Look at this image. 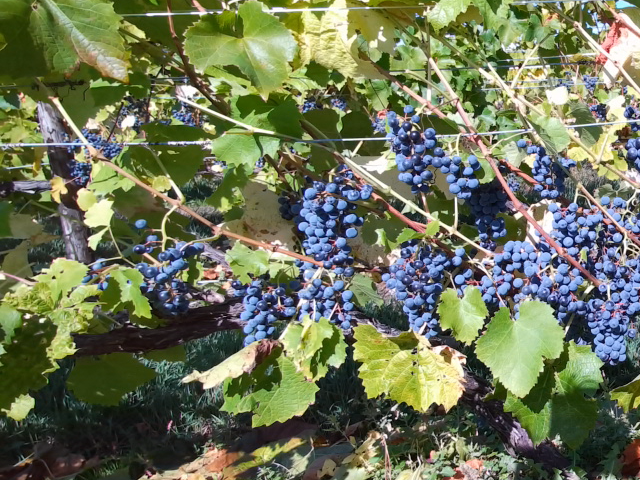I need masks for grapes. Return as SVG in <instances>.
<instances>
[{
	"label": "grapes",
	"mask_w": 640,
	"mask_h": 480,
	"mask_svg": "<svg viewBox=\"0 0 640 480\" xmlns=\"http://www.w3.org/2000/svg\"><path fill=\"white\" fill-rule=\"evenodd\" d=\"M534 235L539 241L535 247L528 241L507 240L502 246L504 253L493 257L495 264L492 280L488 275H483L477 285L484 302L494 304L497 308H508L510 302L507 299L500 301L496 294L506 296L514 288L520 290L510 294V300L514 303V320H518L521 315L519 302L529 295L537 296L550 307L556 308L554 316L563 325L569 322L573 313L585 315L591 334L595 337L594 353L611 366L625 362L627 345L623 337L627 335L629 339H633L637 336V331L629 328L628 322L630 317L640 311V254L626 261L634 271L613 263V260L621 259L616 244L606 249V255L601 257V262L595 263L591 257H587L586 263L581 266L598 281H605L607 275L613 276L610 289L617 292H613L607 302L600 297L589 299L587 302L572 301L569 293H576L579 286L584 284L585 278L573 267L571 272L575 279H572L567 259L557 256L553 261V268L556 270L553 279L559 287L558 290L552 291L553 282L548 274L542 272L541 279L538 278V274L540 269L547 266L556 250L542 239L537 230ZM515 270L530 278L528 285L521 278L513 280L511 273Z\"/></svg>",
	"instance_id": "01657485"
},
{
	"label": "grapes",
	"mask_w": 640,
	"mask_h": 480,
	"mask_svg": "<svg viewBox=\"0 0 640 480\" xmlns=\"http://www.w3.org/2000/svg\"><path fill=\"white\" fill-rule=\"evenodd\" d=\"M395 111L386 113L387 125L392 129L385 135L387 140H392L393 144L390 149L394 155V160L401 172L398 175L400 183H406L410 186L412 194L427 193L430 187L427 184L432 180L433 172L425 170L428 165L439 168L442 174H449L446 181L449 184V190L455 194L458 199L467 200L471 207V213L477 218L474 223L477 225L479 232V245L490 251L497 248L494 240L503 239L508 235L506 224L502 217L496 219V214L500 211H506L507 196L503 194L497 187H491L488 183L480 185L477 175L474 171L481 169V163L475 155L467 158L469 167L462 169V174L466 178H458L463 158L461 156H453L450 158L445 151L437 146L436 130L433 127H427L423 131V136L417 131L412 130V124L409 121L400 124V119Z\"/></svg>",
	"instance_id": "b958b902"
},
{
	"label": "grapes",
	"mask_w": 640,
	"mask_h": 480,
	"mask_svg": "<svg viewBox=\"0 0 640 480\" xmlns=\"http://www.w3.org/2000/svg\"><path fill=\"white\" fill-rule=\"evenodd\" d=\"M345 171L341 176H336L333 182L326 185L321 180H314L311 185H307L302 189L303 196L294 203L284 197H279L277 202L282 204L279 211L286 221H294L297 226L296 230L305 234L302 246L307 255L313 254V258L318 261H324L325 269H332L335 275L344 274L346 277H352L355 274L353 266L341 267L343 263L351 265L354 262L351 248L348 246L347 239H355L358 236V230L355 227L362 226L364 219L358 217L354 212L357 205L353 202H347L343 198L335 199L333 195L325 197L323 200L313 202L317 199V195L325 191L326 193L339 194L346 197L350 201L359 199L368 200L374 191V187L365 183L358 187H350L343 184L345 179H352L355 174L348 170L347 164H341L336 171Z\"/></svg>",
	"instance_id": "0513c4c2"
},
{
	"label": "grapes",
	"mask_w": 640,
	"mask_h": 480,
	"mask_svg": "<svg viewBox=\"0 0 640 480\" xmlns=\"http://www.w3.org/2000/svg\"><path fill=\"white\" fill-rule=\"evenodd\" d=\"M322 284L323 281L320 278H315L311 281V286H306L303 289L297 280H293L288 285L280 283L272 292L262 295L261 282L259 280H252L250 285L247 286L239 280H234L231 286L236 289L235 295L244 298L245 310L239 314V318H242L245 322L241 328V333L247 336L244 338L242 346L247 348L255 341L265 339L267 335L274 334L276 327L271 324L279 320L278 315L291 317L297 313L294 306V298L291 295H285V291L288 288L296 291L295 297L298 300L304 299L296 315L298 321H301L305 314L311 313L314 305L316 314L313 320L315 322H318L323 316L328 317L332 312V307L336 304V300L333 297L335 293L340 292L343 310L339 314H334L330 321L332 323L339 321L342 330L349 328L352 319L349 312L354 308V304L350 301L353 298V292L345 290L343 281H336L333 287H325Z\"/></svg>",
	"instance_id": "84f90ec7"
},
{
	"label": "grapes",
	"mask_w": 640,
	"mask_h": 480,
	"mask_svg": "<svg viewBox=\"0 0 640 480\" xmlns=\"http://www.w3.org/2000/svg\"><path fill=\"white\" fill-rule=\"evenodd\" d=\"M400 247L397 263L388 267V272L380 277V281L386 283L389 290H394L396 299L402 301L401 311L407 313V325L416 333L426 325L428 331L424 337L430 339L441 333L443 327L430 312H424L419 317V308L421 306L430 311L435 307L443 290L440 281L444 278V269L460 267L466 251L457 248L450 258L445 253H437L433 257L430 252L432 246L427 244L424 249L418 246L415 239L403 241Z\"/></svg>",
	"instance_id": "f8a65327"
},
{
	"label": "grapes",
	"mask_w": 640,
	"mask_h": 480,
	"mask_svg": "<svg viewBox=\"0 0 640 480\" xmlns=\"http://www.w3.org/2000/svg\"><path fill=\"white\" fill-rule=\"evenodd\" d=\"M185 246V241H178L174 247H168L158 254L159 261H169V265L166 267L160 266L158 268L156 265L149 266L146 263L134 265V269L138 270L140 274H144L146 279L153 278V281L157 283L156 289L151 288L147 283H141L140 291L156 295V301L161 303L163 309L169 311L171 317H178L180 313L188 310L189 302L185 301L181 294L189 293L191 284L187 281H182L180 278H173L170 280V291L166 289L165 284L168 277L176 275L178 271L186 270L188 262L184 258L204 252L202 243H192L183 249Z\"/></svg>",
	"instance_id": "5460f4e3"
},
{
	"label": "grapes",
	"mask_w": 640,
	"mask_h": 480,
	"mask_svg": "<svg viewBox=\"0 0 640 480\" xmlns=\"http://www.w3.org/2000/svg\"><path fill=\"white\" fill-rule=\"evenodd\" d=\"M579 206L576 203H570L568 210L561 213V206L557 203L550 204L548 211L552 214L550 234L557 238L555 242L561 248H566L567 253L576 262L580 261L578 253L580 249L592 250L594 247L601 248L604 242L620 243L623 235L615 228L614 225L608 224L606 230L612 235H605L603 230L599 232L596 226L605 219V215L598 210L595 215L589 208L581 211L582 216L576 217Z\"/></svg>",
	"instance_id": "83cd7487"
},
{
	"label": "grapes",
	"mask_w": 640,
	"mask_h": 480,
	"mask_svg": "<svg viewBox=\"0 0 640 480\" xmlns=\"http://www.w3.org/2000/svg\"><path fill=\"white\" fill-rule=\"evenodd\" d=\"M516 145L521 148H526V153L528 155L536 154L534 157V161L532 162L533 179L538 183H545L549 186L554 184V187L545 188L542 185L535 184L531 187L533 192H540V197L542 199H557L560 194L565 190L564 179L568 177V174L561 169L560 166H557L553 163V160L549 154H547V150L543 146H539L538 144L530 145L528 141L524 138H518L516 140Z\"/></svg>",
	"instance_id": "e5b3c951"
},
{
	"label": "grapes",
	"mask_w": 640,
	"mask_h": 480,
	"mask_svg": "<svg viewBox=\"0 0 640 480\" xmlns=\"http://www.w3.org/2000/svg\"><path fill=\"white\" fill-rule=\"evenodd\" d=\"M619 208L621 211L626 209V201L623 197H614L612 199V205L607 210L611 213V215L619 222V224L624 227L626 230H630L633 233L640 232V213H637L635 216L631 218V222L626 216L621 217L619 212L615 210Z\"/></svg>",
	"instance_id": "2adb6a1f"
},
{
	"label": "grapes",
	"mask_w": 640,
	"mask_h": 480,
	"mask_svg": "<svg viewBox=\"0 0 640 480\" xmlns=\"http://www.w3.org/2000/svg\"><path fill=\"white\" fill-rule=\"evenodd\" d=\"M624 149L628 151V157L634 160L636 170L640 172V137L630 138Z\"/></svg>",
	"instance_id": "ef6de9ee"
},
{
	"label": "grapes",
	"mask_w": 640,
	"mask_h": 480,
	"mask_svg": "<svg viewBox=\"0 0 640 480\" xmlns=\"http://www.w3.org/2000/svg\"><path fill=\"white\" fill-rule=\"evenodd\" d=\"M473 276V270L471 268H464L462 270V273H457L454 276V283L456 285H459L458 289L456 290V295L458 297H462L464 295V291L466 290V288L468 287L467 279L471 278Z\"/></svg>",
	"instance_id": "1ff8f66d"
},
{
	"label": "grapes",
	"mask_w": 640,
	"mask_h": 480,
	"mask_svg": "<svg viewBox=\"0 0 640 480\" xmlns=\"http://www.w3.org/2000/svg\"><path fill=\"white\" fill-rule=\"evenodd\" d=\"M295 265L297 266V268L299 270L304 272L302 274V278L305 281H309L311 279V277L315 274V272L319 269L318 266H316V265H314L312 263L305 262V261L300 260V259H297L295 261Z\"/></svg>",
	"instance_id": "54f908b8"
},
{
	"label": "grapes",
	"mask_w": 640,
	"mask_h": 480,
	"mask_svg": "<svg viewBox=\"0 0 640 480\" xmlns=\"http://www.w3.org/2000/svg\"><path fill=\"white\" fill-rule=\"evenodd\" d=\"M107 264H108V259L106 257H99L95 260V263H92L90 265V271L91 272L100 271L102 267L106 266Z\"/></svg>",
	"instance_id": "91a60905"
},
{
	"label": "grapes",
	"mask_w": 640,
	"mask_h": 480,
	"mask_svg": "<svg viewBox=\"0 0 640 480\" xmlns=\"http://www.w3.org/2000/svg\"><path fill=\"white\" fill-rule=\"evenodd\" d=\"M559 159H560V162H561L564 166H566L567 168H569V169H570V168H575V167L577 166V162H576L574 159H572V158H569V157H565V158H564V157H560Z\"/></svg>",
	"instance_id": "dcf779d0"
},
{
	"label": "grapes",
	"mask_w": 640,
	"mask_h": 480,
	"mask_svg": "<svg viewBox=\"0 0 640 480\" xmlns=\"http://www.w3.org/2000/svg\"><path fill=\"white\" fill-rule=\"evenodd\" d=\"M98 274L97 273H93V274H86L82 280H81V284L83 286H86L88 284V282L92 281L93 279L97 278Z\"/></svg>",
	"instance_id": "802abce8"
}]
</instances>
